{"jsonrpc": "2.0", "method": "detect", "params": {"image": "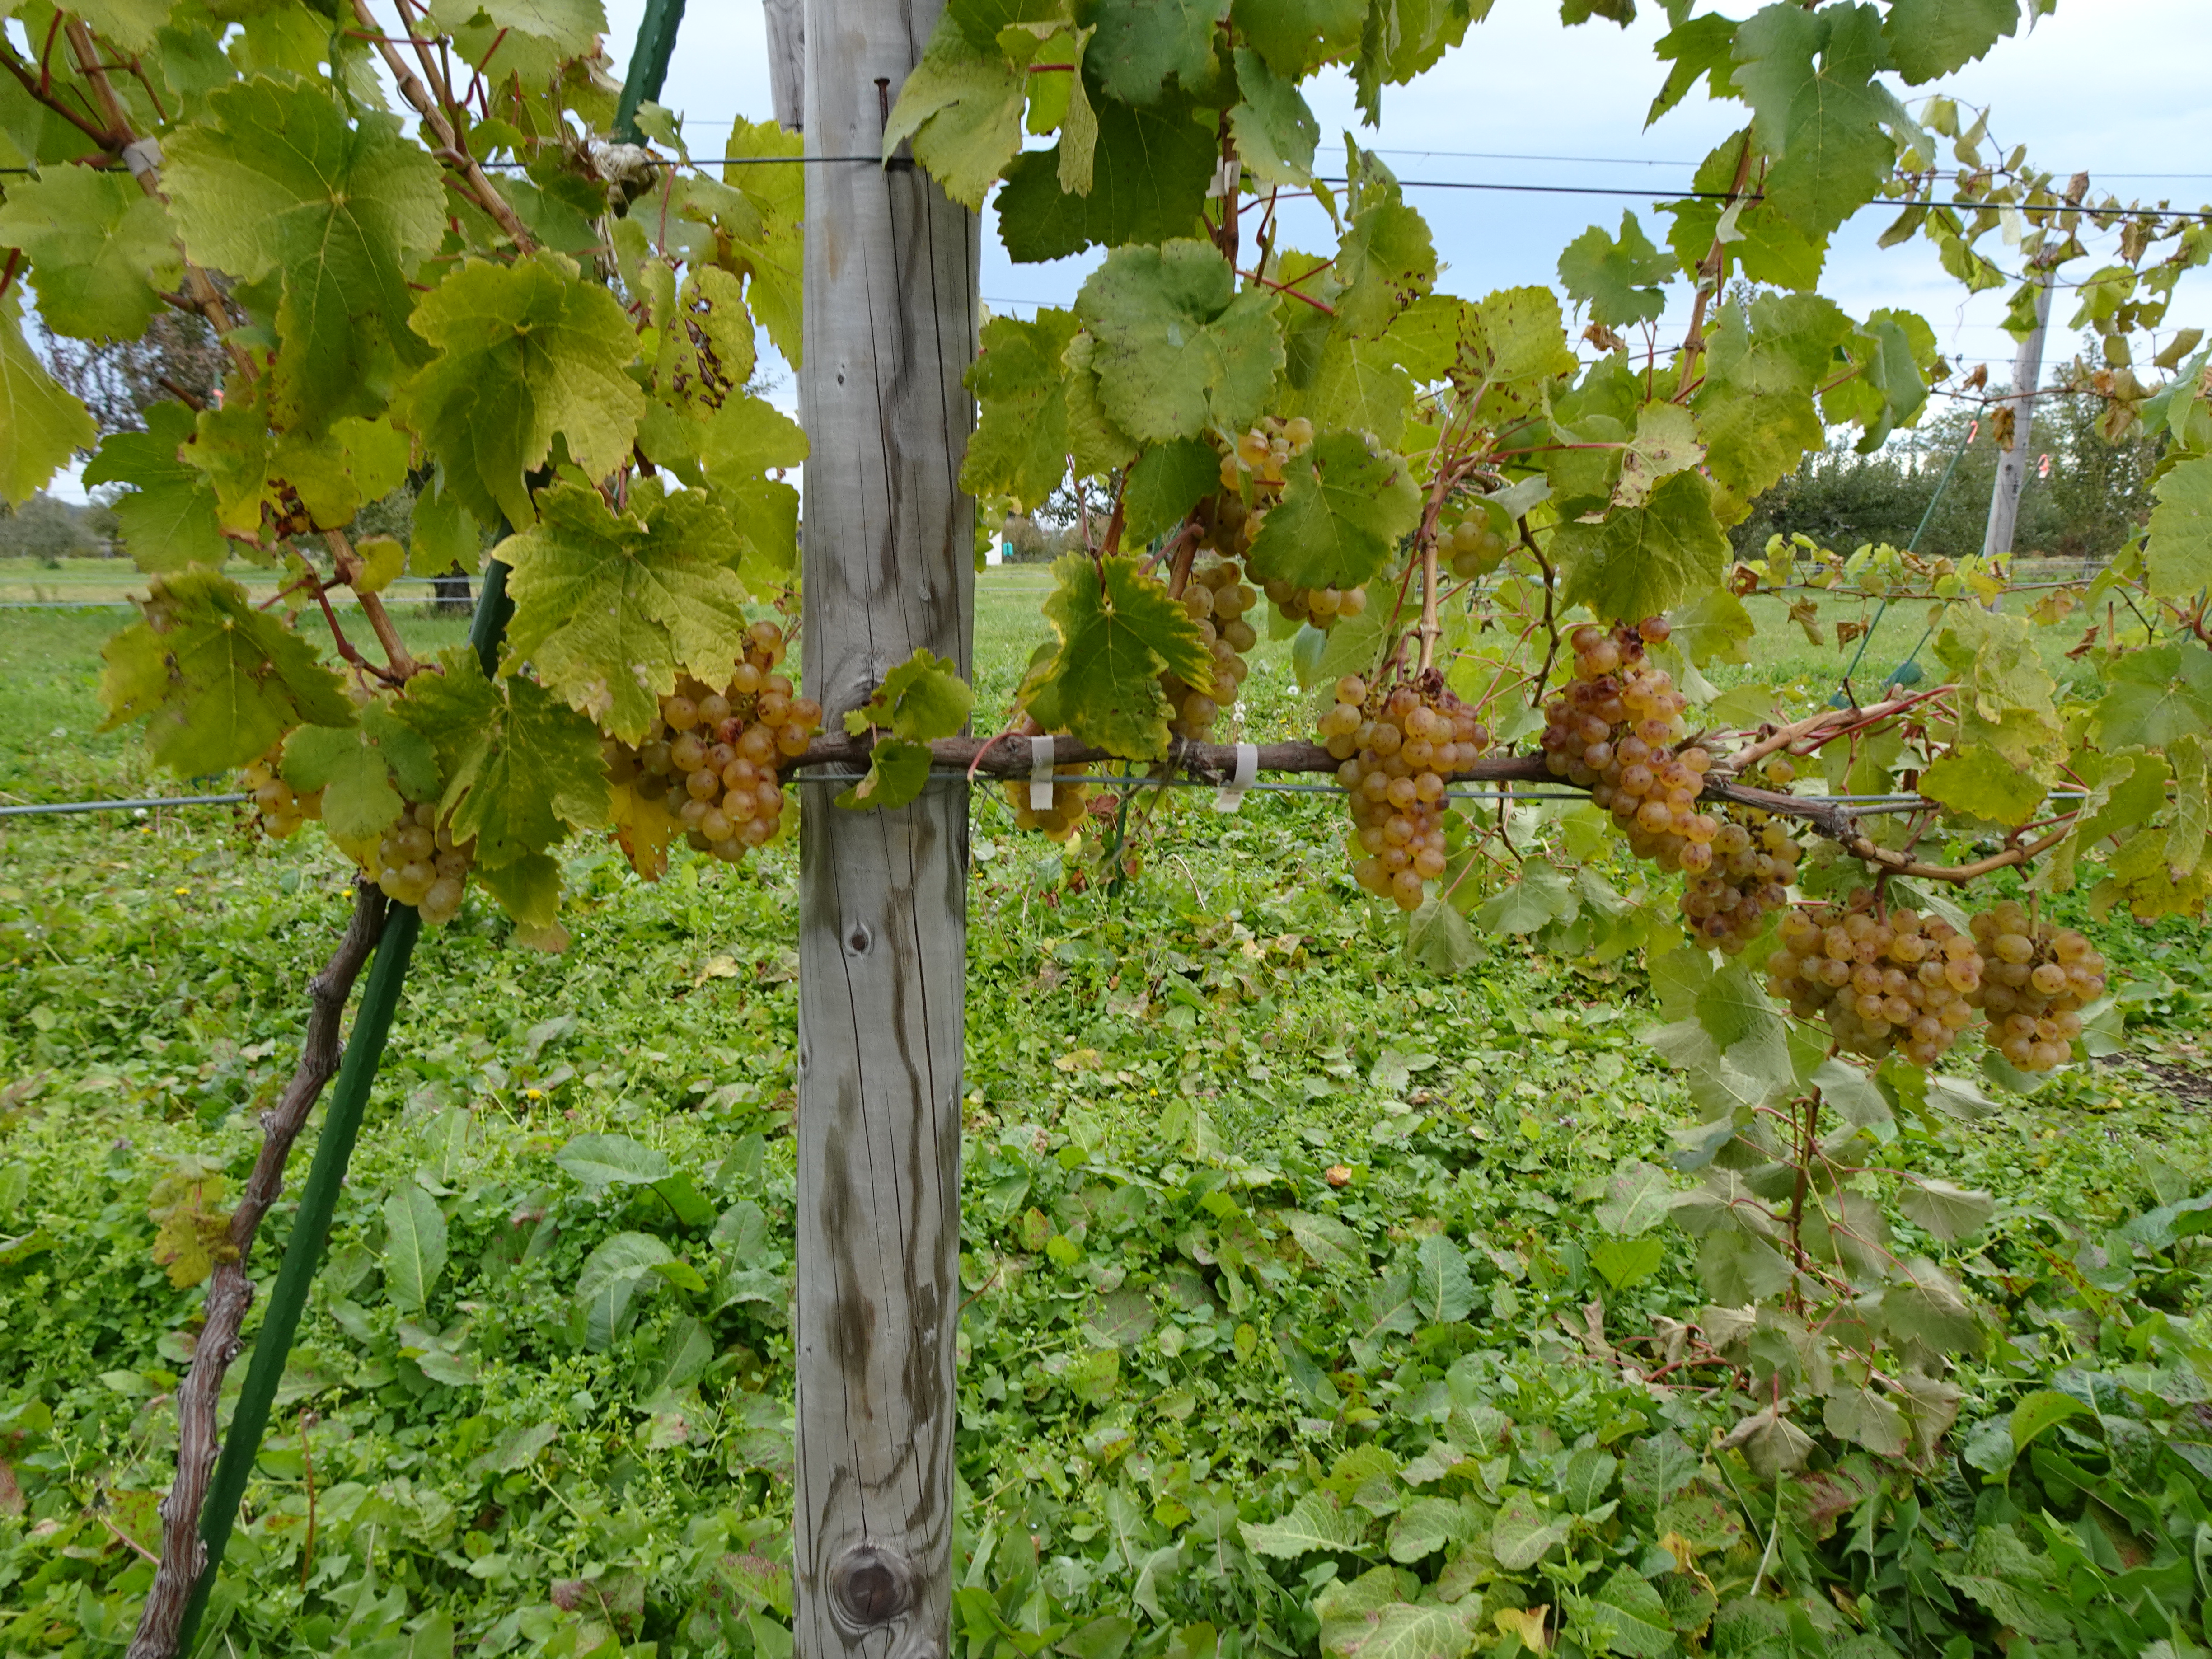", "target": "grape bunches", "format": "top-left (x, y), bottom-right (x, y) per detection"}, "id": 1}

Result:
top-left (1672, 753), bottom-right (1808, 957)
top-left (1764, 883), bottom-right (1881, 1022)
top-left (998, 755), bottom-right (1093, 845)
top-left (1822, 907), bottom-right (1991, 1070)
top-left (1138, 551), bottom-right (1259, 751)
top-left (1431, 503), bottom-right (1507, 577)
top-left (238, 712), bottom-right (336, 839)
top-left (1540, 615), bottom-right (1719, 878)
top-left (1219, 412), bottom-right (1377, 633)
top-left (1959, 897), bottom-right (2108, 1075)
top-left (374, 782), bottom-right (498, 929)
top-left (633, 620), bottom-right (829, 868)
top-left (1313, 668), bottom-right (1492, 914)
